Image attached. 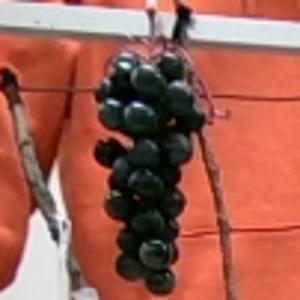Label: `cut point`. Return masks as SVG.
Instances as JSON below:
<instances>
[{
    "label": "cut point",
    "instance_id": "1",
    "mask_svg": "<svg viewBox=\"0 0 300 300\" xmlns=\"http://www.w3.org/2000/svg\"><path fill=\"white\" fill-rule=\"evenodd\" d=\"M143 11L149 24V58L147 66H150L155 58V17L159 13L158 0H145Z\"/></svg>",
    "mask_w": 300,
    "mask_h": 300
}]
</instances>
